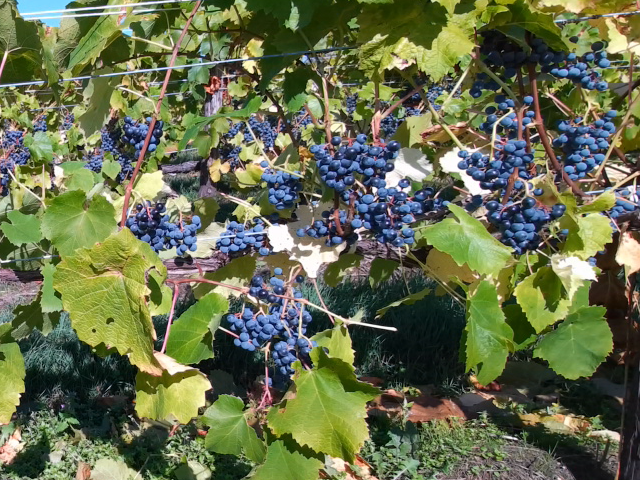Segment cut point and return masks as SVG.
<instances>
[{"label":"cut point","instance_id":"6a23745f","mask_svg":"<svg viewBox=\"0 0 640 480\" xmlns=\"http://www.w3.org/2000/svg\"><path fill=\"white\" fill-rule=\"evenodd\" d=\"M511 113H515V109H512V110H510V111H508V112H504V113H503V115H501V117H500V118H499V119H498V120H497V121L492 125V131H493V132H492V134H491V140H496V138H495V135H496V126H497V125H499V124L504 120V118H505L507 115L511 114Z\"/></svg>","mask_w":640,"mask_h":480},{"label":"cut point","instance_id":"7d7e1d6f","mask_svg":"<svg viewBox=\"0 0 640 480\" xmlns=\"http://www.w3.org/2000/svg\"><path fill=\"white\" fill-rule=\"evenodd\" d=\"M131 193H134L135 195H137V196L139 197V199H141V201H142V203H143L144 207H145L146 209H149V206H148V204L146 203V201H145L144 197L141 195V193H139V192H138V191H136V190H131Z\"/></svg>","mask_w":640,"mask_h":480},{"label":"cut point","instance_id":"deb38ca7","mask_svg":"<svg viewBox=\"0 0 640 480\" xmlns=\"http://www.w3.org/2000/svg\"><path fill=\"white\" fill-rule=\"evenodd\" d=\"M295 152H296V150H295V148H293V149L288 153V155H287V156H286V158H285V163H288L289 159L291 158V156H292V155H293V153H295Z\"/></svg>","mask_w":640,"mask_h":480}]
</instances>
